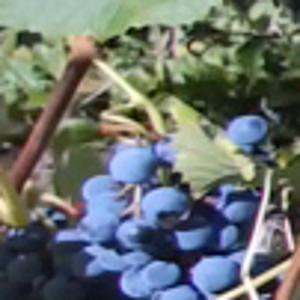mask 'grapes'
<instances>
[{
    "label": "grapes",
    "mask_w": 300,
    "mask_h": 300,
    "mask_svg": "<svg viewBox=\"0 0 300 300\" xmlns=\"http://www.w3.org/2000/svg\"><path fill=\"white\" fill-rule=\"evenodd\" d=\"M270 134V123L260 113L242 114L231 119L224 128L228 143L241 150L246 156L256 152V146Z\"/></svg>",
    "instance_id": "2"
},
{
    "label": "grapes",
    "mask_w": 300,
    "mask_h": 300,
    "mask_svg": "<svg viewBox=\"0 0 300 300\" xmlns=\"http://www.w3.org/2000/svg\"><path fill=\"white\" fill-rule=\"evenodd\" d=\"M168 136L151 145L116 142L103 163V175L79 185L85 205L77 224L55 207L46 211L58 227L52 235L58 255H72L69 275L76 281L96 280L109 273L118 279V293L130 300H204L220 298L242 284L240 262L246 249L258 195L224 183L213 210L193 214L172 225L168 239L186 258L189 283L181 267L170 259L141 253L135 238L158 231L160 216H181L190 207L188 195L176 186H153L141 194L143 218L130 213L126 186L146 187L160 169L175 165V149Z\"/></svg>",
    "instance_id": "1"
}]
</instances>
